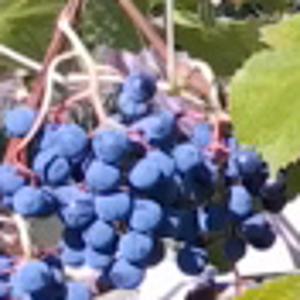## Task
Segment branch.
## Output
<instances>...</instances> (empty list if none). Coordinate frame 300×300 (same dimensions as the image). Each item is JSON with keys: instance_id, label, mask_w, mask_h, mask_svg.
<instances>
[{"instance_id": "obj_1", "label": "branch", "mask_w": 300, "mask_h": 300, "mask_svg": "<svg viewBox=\"0 0 300 300\" xmlns=\"http://www.w3.org/2000/svg\"><path fill=\"white\" fill-rule=\"evenodd\" d=\"M115 3L119 5L122 11L128 16L136 31L153 51L157 53L159 59L177 68L180 75L198 94H205L207 92L206 81L199 75L194 67L188 66V59L181 52L160 37L152 24L147 20L145 14L133 0H115Z\"/></svg>"}, {"instance_id": "obj_2", "label": "branch", "mask_w": 300, "mask_h": 300, "mask_svg": "<svg viewBox=\"0 0 300 300\" xmlns=\"http://www.w3.org/2000/svg\"><path fill=\"white\" fill-rule=\"evenodd\" d=\"M54 37L44 57L40 72L31 88L27 105L35 110L41 108V104L46 95V83L48 70L51 61L60 53H63L68 47L69 41L67 37L58 29L53 30Z\"/></svg>"}, {"instance_id": "obj_3", "label": "branch", "mask_w": 300, "mask_h": 300, "mask_svg": "<svg viewBox=\"0 0 300 300\" xmlns=\"http://www.w3.org/2000/svg\"><path fill=\"white\" fill-rule=\"evenodd\" d=\"M30 160V146L24 139L13 138L6 147L4 163L23 174H27L30 171Z\"/></svg>"}, {"instance_id": "obj_4", "label": "branch", "mask_w": 300, "mask_h": 300, "mask_svg": "<svg viewBox=\"0 0 300 300\" xmlns=\"http://www.w3.org/2000/svg\"><path fill=\"white\" fill-rule=\"evenodd\" d=\"M91 4V0H67L55 13L57 18H62L68 25H79Z\"/></svg>"}]
</instances>
